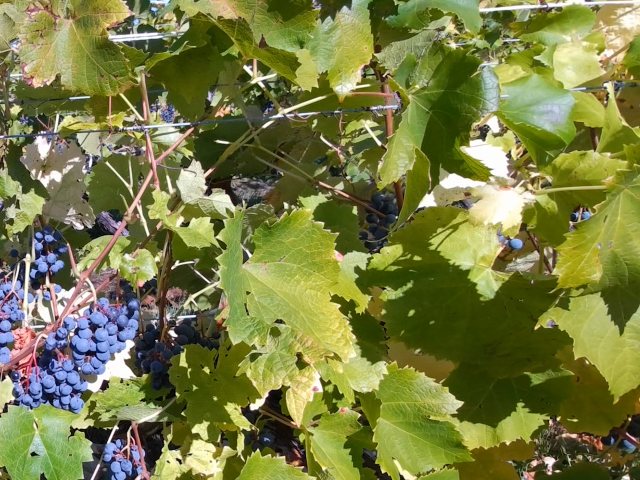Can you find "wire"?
<instances>
[{
    "instance_id": "wire-1",
    "label": "wire",
    "mask_w": 640,
    "mask_h": 480,
    "mask_svg": "<svg viewBox=\"0 0 640 480\" xmlns=\"http://www.w3.org/2000/svg\"><path fill=\"white\" fill-rule=\"evenodd\" d=\"M400 104H383L380 106H359V107H348L339 110H318L313 112H282L275 114H256L251 116H245L236 119H223V118H210V119H199L196 121H181L174 123H156V124H147V125H121V126H113V127H105V128H90L79 130V135H87L92 133H107V132H115V131H123V130H149V129H158V128H176L183 126H198L201 124H212V123H221V124H238L247 121H253L258 119H277V118H285V117H315L320 115H342L350 112H361V111H382L385 109H400Z\"/></svg>"
},
{
    "instance_id": "wire-4",
    "label": "wire",
    "mask_w": 640,
    "mask_h": 480,
    "mask_svg": "<svg viewBox=\"0 0 640 480\" xmlns=\"http://www.w3.org/2000/svg\"><path fill=\"white\" fill-rule=\"evenodd\" d=\"M58 134V131L53 133H27V134H9V135H1L0 139L3 138H12V137H29V136H55Z\"/></svg>"
},
{
    "instance_id": "wire-3",
    "label": "wire",
    "mask_w": 640,
    "mask_h": 480,
    "mask_svg": "<svg viewBox=\"0 0 640 480\" xmlns=\"http://www.w3.org/2000/svg\"><path fill=\"white\" fill-rule=\"evenodd\" d=\"M183 35H184L183 31L155 32V33H117L116 35H110L109 40L125 41V42H149L153 40L177 38Z\"/></svg>"
},
{
    "instance_id": "wire-2",
    "label": "wire",
    "mask_w": 640,
    "mask_h": 480,
    "mask_svg": "<svg viewBox=\"0 0 640 480\" xmlns=\"http://www.w3.org/2000/svg\"><path fill=\"white\" fill-rule=\"evenodd\" d=\"M640 0H604L603 2H570L559 1L551 4H524V5H512L509 7H487L481 8V13L489 12H511L514 10H526V9H553L556 7H605L610 4H625V3H639Z\"/></svg>"
}]
</instances>
